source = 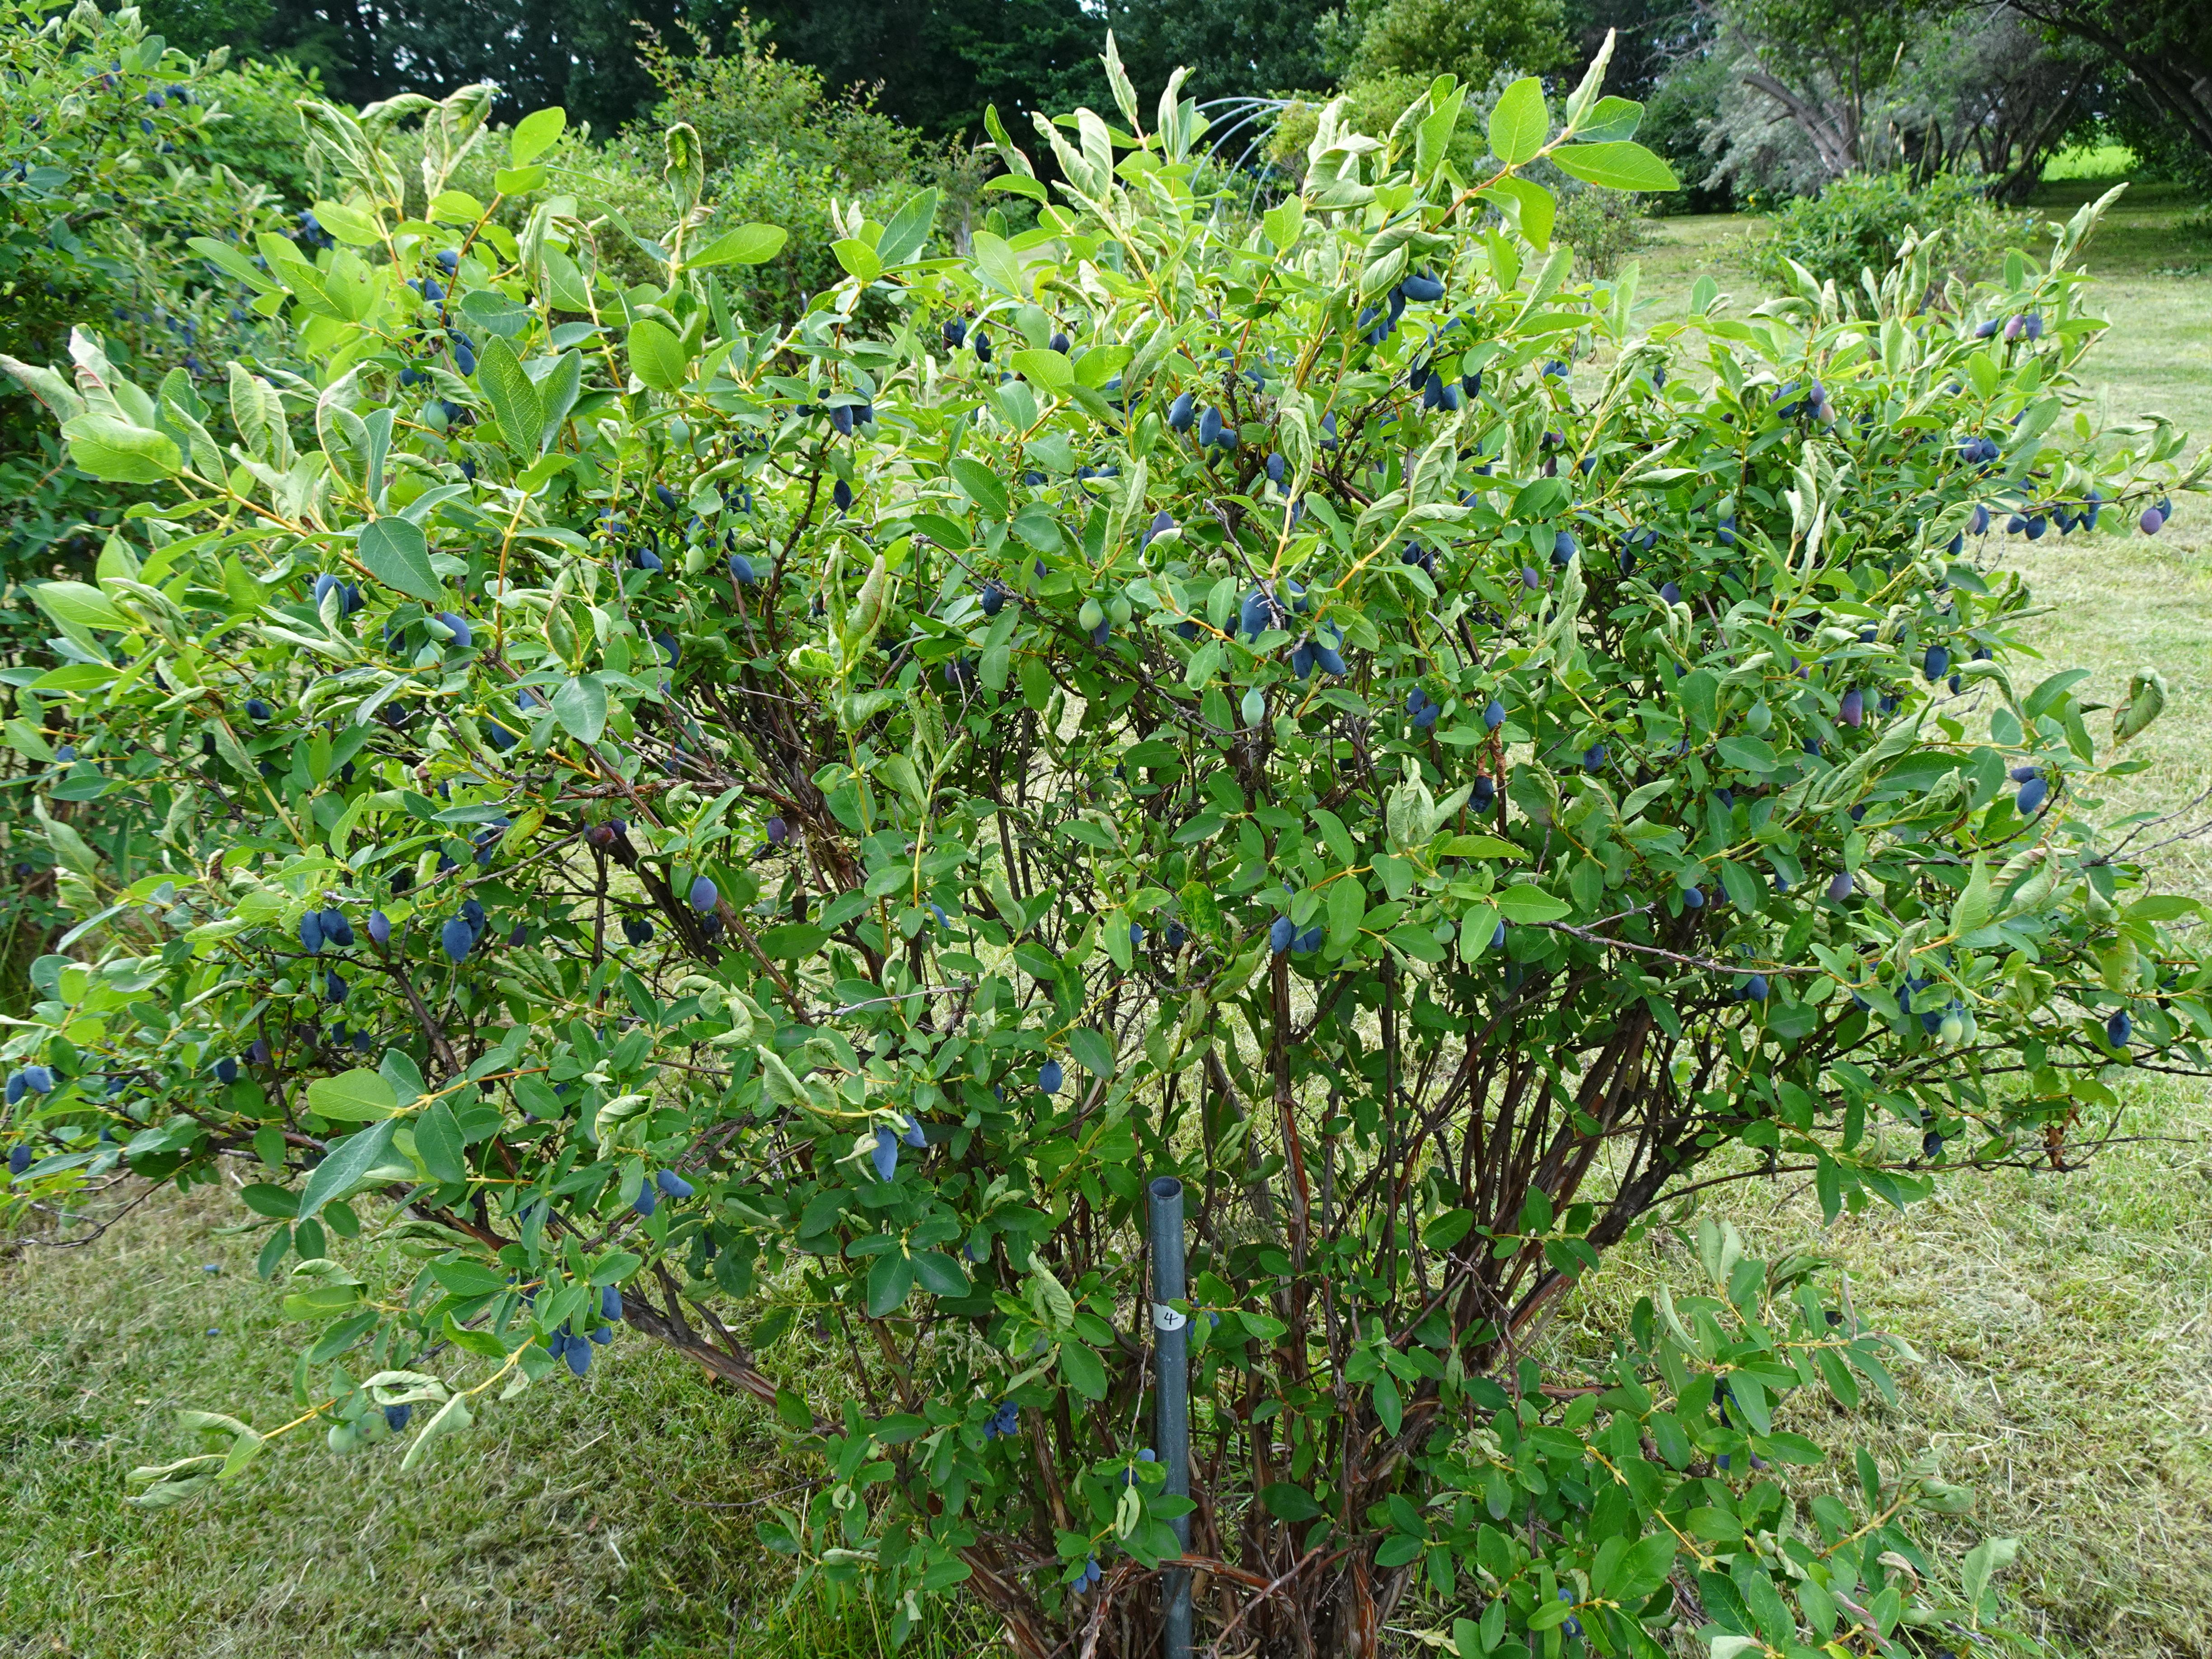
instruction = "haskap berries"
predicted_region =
[958,656,970,680]
[1092,442,1103,467]
[639,918,656,944]
[1829,871,1854,905]
[732,554,758,586]
[1889,697,1901,717]
[1026,473,1041,486]
[1266,348,1273,362]
[1462,306,1475,326]
[1840,508,1850,518]
[1177,620,1195,643]
[842,568,848,580]
[1825,1306,1840,1325]
[1748,975,1769,1000]
[400,369,417,387]
[2153,496,2172,523]
[434,263,454,278]
[1232,340,1242,351]
[1876,697,1890,718]
[1583,742,1604,772]
[388,877,394,882]
[1921,1001,1947,1035]
[755,844,775,858]
[1556,530,1576,561]
[1304,924,1321,953]
[983,1420,999,1440]
[1312,638,1348,675]
[1733,983,1749,1001]
[459,898,488,932]
[1947,531,1962,556]
[564,1334,592,1375]
[1371,302,1388,340]
[1277,484,1299,529]
[1253,356,1278,378]
[2004,314,2025,339]
[1822,661,1832,679]
[1105,372,1121,403]
[1716,493,1734,519]
[1836,415,1853,440]
[834,480,852,512]
[1219,430,1240,448]
[478,1075,494,1094]
[1132,531,1135,538]
[945,661,959,684]
[1545,455,1558,478]
[2060,516,2079,535]
[1858,413,1872,440]
[1320,616,1343,653]
[469,829,491,865]
[975,332,991,363]
[705,915,719,933]
[1267,452,1284,483]
[606,818,627,834]
[58,748,75,776]
[1233,455,1240,470]
[1187,1319,1197,1341]
[1920,1109,1937,1128]
[427,400,448,434]
[1205,309,1217,326]
[1270,915,1293,953]
[1922,1131,1944,1159]
[1293,629,1317,679]
[1915,519,1922,535]
[1440,384,1457,411]
[1274,578,1308,610]
[458,456,478,480]
[1770,386,1779,406]
[1074,303,1091,320]
[1552,363,1568,387]
[766,814,789,847]
[332,1019,352,1046]
[1936,1008,1963,1044]
[368,910,390,943]
[1541,359,1557,380]
[600,507,621,537]
[2140,508,2162,535]
[388,830,398,838]
[1172,409,1194,434]
[1603,883,1610,891]
[1712,931,1728,951]
[347,580,368,614]
[435,306,452,327]
[1084,1561,1099,1581]
[725,535,736,551]
[1744,695,1773,735]
[597,741,620,768]
[1457,490,1465,503]
[320,906,355,946]
[796,389,830,417]
[292,1024,304,1037]
[328,1421,355,1453]
[1192,1299,1201,1308]
[1893,625,1906,641]
[2078,512,2096,532]
[2066,467,2082,490]
[1622,758,1637,777]
[2026,314,2044,341]
[504,1276,525,1307]
[1434,919,1455,943]
[1653,365,1665,389]
[713,480,729,512]
[420,635,432,650]
[218,1057,237,1084]
[1111,588,1132,627]
[1903,975,1936,1014]
[439,855,457,872]
[1725,570,1743,586]
[1470,773,1494,813]
[1531,609,1555,624]
[621,915,631,935]
[1132,388,1145,402]
[1037,1055,1066,1097]
[1948,673,1961,695]
[660,678,670,695]
[898,1111,933,1157]
[1555,360,1562,369]
[251,1038,269,1062]
[769,537,784,558]
[1474,460,1492,476]
[1946,997,1962,1015]
[982,581,1007,616]
[126,1077,141,1096]
[1444,318,1460,332]
[1053,333,1071,355]
[1953,830,1976,851]
[323,721,330,730]
[325,969,348,1003]
[1922,435,1937,443]
[1613,532,1631,546]
[1441,699,1456,719]
[1357,308,1379,346]
[1850,961,1881,1012]
[1418,546,1434,575]
[1100,403,1117,426]
[783,814,799,847]
[441,914,473,963]
[852,412,864,425]
[1416,264,1440,287]
[391,875,404,894]
[1924,645,1948,681]
[862,533,874,551]
[881,635,899,660]
[446,328,475,350]
[1692,909,1704,928]
[1078,594,1104,632]
[670,419,690,452]
[1411,355,1431,391]
[2054,506,2071,529]
[300,909,325,955]
[1539,430,1549,450]
[422,277,444,308]
[2047,505,2058,517]
[1821,425,1832,435]
[107,1077,124,1095]
[1437,401,1447,413]
[440,576,447,589]
[1580,461,1584,472]
[1165,921,1184,950]
[1720,412,1734,424]
[1402,541,1428,568]
[1477,440,1500,461]
[1740,943,1755,960]
[1087,781,1098,802]
[830,400,853,436]
[2017,778,2047,815]
[1114,763,1126,781]
[1070,523,1080,543]
[1713,786,1732,811]
[998,1401,1021,1415]
[1225,616,1238,633]
[508,640,517,648]
[686,544,704,574]
[8,1145,31,1174]
[25,1067,50,1092]
[626,547,633,560]
[1961,436,1980,460]
[1166,392,1193,428]
[519,695,537,711]
[1558,1587,1575,1605]
[1551,428,1564,443]
[2025,514,2046,541]
[212,1059,218,1077]
[414,332,437,345]
[626,922,640,946]
[627,1176,655,1219]
[811,596,820,618]
[919,903,951,929]
[1958,1008,1980,1044]
[618,752,624,765]
[2156,974,2183,1010]
[1034,560,1047,579]
[1284,884,1293,896]
[2019,479,2029,491]
[1381,414,1399,443]
[315,573,352,617]
[1078,465,1097,498]
[387,701,405,730]
[1661,582,1679,607]
[415,694,427,717]
[1462,369,1480,399]
[685,514,705,545]
[1717,877,1732,902]
[1462,487,1477,508]
[1135,1449,1155,1464]
[483,817,512,837]
[360,662,372,668]
[1484,698,1506,731]
[584,822,617,847]
[728,527,734,540]
[104,1053,121,1069]
[442,397,467,422]
[1317,410,1336,448]
[1584,456,1597,476]
[731,434,745,458]
[871,1125,897,1182]
[511,567,526,589]
[1123,401,1139,428]
[519,689,529,705]
[731,483,752,515]
[1978,454,1998,478]
[1366,461,1378,488]
[1552,436,1564,451]
[1221,347,1234,367]
[1062,308,1078,329]
[1487,610,1500,625]
[1712,1377,1731,1405]
[1140,531,1152,555]
[654,630,680,668]
[640,547,664,578]
[423,842,443,854]
[341,763,358,784]
[466,593,481,619]
[1240,582,1269,643]
[1575,500,1590,515]
[2079,470,2093,493]
[456,344,475,376]
[423,616,456,640]
[1195,625,1199,635]
[2108,1010,2131,1049]
[1711,886,1725,911]
[1625,526,1642,544]
[1000,372,1012,381]
[1642,529,1658,550]
[492,710,517,749]
[1774,868,1789,893]
[655,484,679,512]
[943,318,953,350]
[851,568,863,577]
[1269,596,1292,631]
[1121,1467,1139,1486]
[1980,435,2000,457]
[964,1242,977,1261]
[1197,407,1221,447]
[2025,477,2037,494]
[1034,1332,1048,1354]
[994,1411,1019,1435]
[1702,451,1706,456]
[1357,363,1372,373]
[1424,372,1444,408]
[1288,354,1295,366]
[1380,412,1387,427]
[2010,409,2024,425]
[1151,510,1174,540]
[1819,405,1834,426]
[50,1064,65,1082]
[1049,339,1053,350]
[1618,544,1639,575]
[1488,920,1506,949]
[1406,687,1425,714]
[1717,1454,1731,1469]
[300,574,314,586]
[1402,273,1445,301]
[1129,923,1144,943]
[1860,686,1878,714]
[414,354,433,389]
[441,611,474,650]
[1480,366,1483,375]
[837,512,847,521]
[824,609,827,615]
[199,734,217,755]
[1973,504,1990,536]
[299,1024,316,1046]
[1971,645,1992,663]
[631,545,645,571]
[1291,923,1306,953]
[1069,1570,1086,1593]
[2083,491,2102,512]
[423,400,435,431]
[706,537,728,568]
[1415,703,1440,728]
[1240,686,1267,727]
[585,1304,612,1345]
[1466,598,1485,625]
[384,1401,413,1431]
[753,446,759,451]
[596,1284,624,1321]
[407,278,420,292]
[242,1048,254,1066]
[437,781,449,796]
[671,859,691,898]
[1851,803,1867,828]
[544,1327,570,1361]
[1855,620,1877,643]
[759,433,770,451]
[1749,1452,1766,1469]
[1844,688,1863,728]
[1652,381,1659,393]
[1092,615,1110,647]
[1966,510,1979,535]
[1209,448,1220,467]
[1386,285,1406,326]
[352,1028,370,1054]
[356,1413,387,1443]
[1240,370,1266,394]
[1932,572,1949,594]
[951,317,967,350]
[384,623,407,652]
[1948,384,1962,395]
[1041,472,1049,486]
[258,760,274,775]
[1789,656,1809,680]
[620,523,628,535]
[1389,323,1397,332]
[1457,441,1472,462]
[83,750,104,775]
[774,410,788,422]
[1804,401,1825,420]
[1684,887,1703,907]
[2010,767,2046,783]
[525,1285,541,1308]
[1720,1395,1742,1426]
[403,878,409,891]
[1522,567,1539,590]
[1327,438,1339,451]
[1716,516,1736,543]
[1095,465,1118,480]
[247,699,270,731]
[1375,457,1405,481]
[1814,420,1827,433]
[2006,508,2029,534]
[1811,379,1825,405]
[1202,1311,1219,1326]
[1776,381,1799,419]
[509,924,533,949]
[743,431,756,453]
[1029,470,1043,483]
[61,1205,79,1228]
[1302,791,1316,811]
[1668,740,1691,758]
[1674,661,1688,679]
[1564,1616,1584,1638]
[1428,323,1445,353]
[438,250,459,267]
[814,594,824,616]
[1620,869,1631,888]
[1577,334,1592,359]
[1549,548,1561,564]
[154,670,171,691]
[854,387,872,422]
[1932,536,1950,548]
[6,1075,28,1105]
[100,1128,118,1143]
[656,1169,698,1197]
[1945,953,1951,968]
[1976,317,1999,338]
[690,875,717,914]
